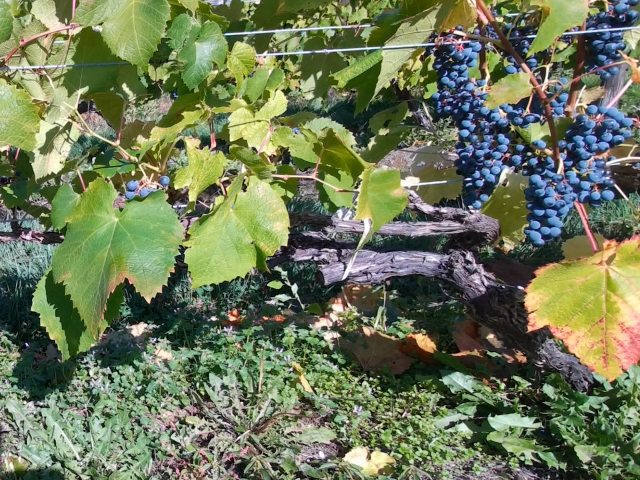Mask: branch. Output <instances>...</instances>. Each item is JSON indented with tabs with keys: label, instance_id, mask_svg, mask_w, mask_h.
<instances>
[{
	"label": "branch",
	"instance_id": "obj_2",
	"mask_svg": "<svg viewBox=\"0 0 640 480\" xmlns=\"http://www.w3.org/2000/svg\"><path fill=\"white\" fill-rule=\"evenodd\" d=\"M586 35L580 34L577 38L578 41V60L576 63V67L573 73V84L571 85L570 91V99L568 102V109L566 111V115L571 117L575 111V105L577 102V94L580 83V76L583 70V66L585 63V45H586Z\"/></svg>",
	"mask_w": 640,
	"mask_h": 480
},
{
	"label": "branch",
	"instance_id": "obj_1",
	"mask_svg": "<svg viewBox=\"0 0 640 480\" xmlns=\"http://www.w3.org/2000/svg\"><path fill=\"white\" fill-rule=\"evenodd\" d=\"M478 9L481 11V13L485 16L486 20L488 21V23L490 24L491 28L493 29V33L494 35L497 37V39L499 40V42L501 43V45L504 47V49L507 51V53L509 55H512L514 59L518 60V63L521 67V69L525 72L528 73L529 78V82L534 86V89L536 91V93L538 94V96L540 97V101L543 104L544 108H545V112H546V116L548 119V124H549V130L551 133V139L553 142V155H554V164L556 166L560 165V161H559V155H560V149L558 148V139L556 136V131H555V123L553 122V116L550 110V102L548 97L543 94V91L541 90L538 82L535 80V74L533 72H530V69L526 66L523 58L521 55H519L510 45V43L508 42V40L506 39V37L504 36V34L501 32L499 25L497 24L496 20L493 18V15L490 13V11L487 9V7L483 4L480 3L478 5Z\"/></svg>",
	"mask_w": 640,
	"mask_h": 480
},
{
	"label": "branch",
	"instance_id": "obj_3",
	"mask_svg": "<svg viewBox=\"0 0 640 480\" xmlns=\"http://www.w3.org/2000/svg\"><path fill=\"white\" fill-rule=\"evenodd\" d=\"M480 43L483 44V51L479 52L478 66H479L480 77L482 80H485L486 74H485L484 68H485L486 41L484 39H481Z\"/></svg>",
	"mask_w": 640,
	"mask_h": 480
},
{
	"label": "branch",
	"instance_id": "obj_4",
	"mask_svg": "<svg viewBox=\"0 0 640 480\" xmlns=\"http://www.w3.org/2000/svg\"><path fill=\"white\" fill-rule=\"evenodd\" d=\"M477 24H478L477 29L481 30L480 36L481 37H485L486 36V25L483 24L481 17L477 18Z\"/></svg>",
	"mask_w": 640,
	"mask_h": 480
}]
</instances>
